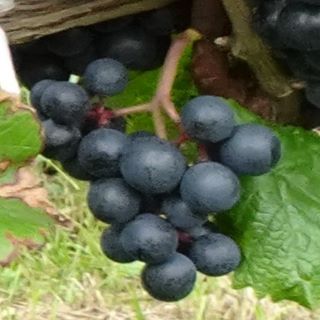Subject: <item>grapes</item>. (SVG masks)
I'll use <instances>...</instances> for the list:
<instances>
[{
	"instance_id": "b958b902",
	"label": "grapes",
	"mask_w": 320,
	"mask_h": 320,
	"mask_svg": "<svg viewBox=\"0 0 320 320\" xmlns=\"http://www.w3.org/2000/svg\"><path fill=\"white\" fill-rule=\"evenodd\" d=\"M251 27L288 76L305 80L320 107V0H244Z\"/></svg>"
},
{
	"instance_id": "01657485",
	"label": "grapes",
	"mask_w": 320,
	"mask_h": 320,
	"mask_svg": "<svg viewBox=\"0 0 320 320\" xmlns=\"http://www.w3.org/2000/svg\"><path fill=\"white\" fill-rule=\"evenodd\" d=\"M195 0H178L91 25L32 35L9 45L19 82L46 138L40 155L71 177L91 181L88 204L110 223L101 250L115 262L147 265L142 284L156 300L180 301L196 271L220 276L241 264V249L207 220L240 198L238 176L259 177L279 164L280 138L267 126L242 124L225 98L202 95L180 109L182 133L207 146L208 161L188 166L180 144L138 131L126 118L103 127L84 104L122 92L127 71L159 69L175 37L190 27Z\"/></svg>"
}]
</instances>
